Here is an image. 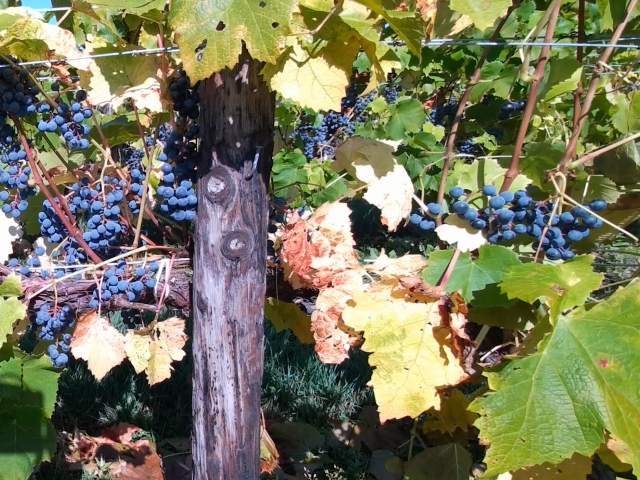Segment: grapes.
Here are the masks:
<instances>
[{
	"instance_id": "01657485",
	"label": "grapes",
	"mask_w": 640,
	"mask_h": 480,
	"mask_svg": "<svg viewBox=\"0 0 640 480\" xmlns=\"http://www.w3.org/2000/svg\"><path fill=\"white\" fill-rule=\"evenodd\" d=\"M103 182L116 186V191L108 192L106 195V209L101 198H92L98 196L101 191L102 182L96 183V190L90 191L88 187L91 180L88 177H82L78 182H74L71 189L76 193L72 198V202L68 204L70 212L76 219L77 209L89 210L90 219L86 222L91 232H84L82 240L92 248L93 252L99 256L102 261L112 259L115 256L128 252L126 247H120V241L117 234H121L125 229V224L120 222L118 214L121 213V207L118 202L123 201V183L128 180H120L119 177H103Z\"/></svg>"
},
{
	"instance_id": "b958b902",
	"label": "grapes",
	"mask_w": 640,
	"mask_h": 480,
	"mask_svg": "<svg viewBox=\"0 0 640 480\" xmlns=\"http://www.w3.org/2000/svg\"><path fill=\"white\" fill-rule=\"evenodd\" d=\"M163 152L159 155L161 162L174 160L177 165L163 163L161 171L163 180L157 188V195L166 198L161 203V212L168 214L176 222L192 221L195 218L193 208L197 203L196 189L193 184L198 182V172L193 169L198 163V151L196 144L189 142L187 145L183 135L178 131H172L169 138L163 140Z\"/></svg>"
},
{
	"instance_id": "0513c4c2",
	"label": "grapes",
	"mask_w": 640,
	"mask_h": 480,
	"mask_svg": "<svg viewBox=\"0 0 640 480\" xmlns=\"http://www.w3.org/2000/svg\"><path fill=\"white\" fill-rule=\"evenodd\" d=\"M490 207L497 216L492 218V233L487 236L491 244L503 241L512 242L516 235H528L537 238L532 243V250L537 251L543 239V229L555 210V203L548 201L544 205L535 204V199L527 190L514 193L503 191L499 196L489 199Z\"/></svg>"
},
{
	"instance_id": "84f90ec7",
	"label": "grapes",
	"mask_w": 640,
	"mask_h": 480,
	"mask_svg": "<svg viewBox=\"0 0 640 480\" xmlns=\"http://www.w3.org/2000/svg\"><path fill=\"white\" fill-rule=\"evenodd\" d=\"M588 210L574 205L572 211L564 210L560 215H554L551 227L542 242L540 252H545V258L551 262L560 259L563 262L572 260L576 253L571 251V245L566 241H582L591 235V229H599L603 221L589 211H605L608 203L604 199H592L588 204H583Z\"/></svg>"
},
{
	"instance_id": "f8a65327",
	"label": "grapes",
	"mask_w": 640,
	"mask_h": 480,
	"mask_svg": "<svg viewBox=\"0 0 640 480\" xmlns=\"http://www.w3.org/2000/svg\"><path fill=\"white\" fill-rule=\"evenodd\" d=\"M28 74L27 69H21L18 76L10 69H0V150L11 144L15 138V129L6 124L7 111L19 117H25L35 111L39 114L53 111L50 104L40 103V99L35 96L40 91L27 79Z\"/></svg>"
},
{
	"instance_id": "5460f4e3",
	"label": "grapes",
	"mask_w": 640,
	"mask_h": 480,
	"mask_svg": "<svg viewBox=\"0 0 640 480\" xmlns=\"http://www.w3.org/2000/svg\"><path fill=\"white\" fill-rule=\"evenodd\" d=\"M52 309L49 304H42L41 308L35 313L34 323L37 326H43L41 332L38 334V339L44 342H51L57 339V331L64 334L62 339L57 341V345L62 352L57 349L55 344L48 346L49 358L52 363L57 367H64L70 362V356L68 352L71 347L68 343L72 340V335L67 333L69 327L75 326V319L71 317L72 309L69 305L62 306L59 311L55 313L56 317H52L48 311Z\"/></svg>"
},
{
	"instance_id": "83cd7487",
	"label": "grapes",
	"mask_w": 640,
	"mask_h": 480,
	"mask_svg": "<svg viewBox=\"0 0 640 480\" xmlns=\"http://www.w3.org/2000/svg\"><path fill=\"white\" fill-rule=\"evenodd\" d=\"M127 266V261L121 258L116 261V269L107 268L104 271V277L107 279L104 280L101 285V289L103 290L102 299L104 301H108L119 294L127 295L128 300L139 301L141 299V291L145 285L149 289H153L158 283L156 277L147 278L144 283L140 280H135L132 283L125 280L119 281L116 276L123 275Z\"/></svg>"
},
{
	"instance_id": "e5b3c951",
	"label": "grapes",
	"mask_w": 640,
	"mask_h": 480,
	"mask_svg": "<svg viewBox=\"0 0 640 480\" xmlns=\"http://www.w3.org/2000/svg\"><path fill=\"white\" fill-rule=\"evenodd\" d=\"M55 102L59 104L56 108L58 115H53L52 119L47 123L46 119H41L37 126L39 131H47L48 133H55L59 128V131L63 134V139L67 140V147L71 150L87 151L90 147V142L86 138H80L79 135L86 136L91 133V127L89 125H81L77 133L69 127L68 119L64 114L69 111V106L63 102L62 97L55 99Z\"/></svg>"
},
{
	"instance_id": "2adb6a1f",
	"label": "grapes",
	"mask_w": 640,
	"mask_h": 480,
	"mask_svg": "<svg viewBox=\"0 0 640 480\" xmlns=\"http://www.w3.org/2000/svg\"><path fill=\"white\" fill-rule=\"evenodd\" d=\"M181 77L170 82L169 91L172 93V110L178 112L180 118L189 117L196 119L199 116L198 103L200 102L199 88L201 82L197 81L194 87H190L187 72L182 67L178 68Z\"/></svg>"
},
{
	"instance_id": "ef6de9ee",
	"label": "grapes",
	"mask_w": 640,
	"mask_h": 480,
	"mask_svg": "<svg viewBox=\"0 0 640 480\" xmlns=\"http://www.w3.org/2000/svg\"><path fill=\"white\" fill-rule=\"evenodd\" d=\"M42 207L44 211L38 213V222L41 224L40 234L46 236L49 244L60 243L67 238L68 230L48 199L43 201Z\"/></svg>"
},
{
	"instance_id": "1ff8f66d",
	"label": "grapes",
	"mask_w": 640,
	"mask_h": 480,
	"mask_svg": "<svg viewBox=\"0 0 640 480\" xmlns=\"http://www.w3.org/2000/svg\"><path fill=\"white\" fill-rule=\"evenodd\" d=\"M453 211L457 214L460 220L469 221V225L472 229L486 230L488 228V217L491 213L489 207H485L482 210L470 209V204L465 200L456 201L452 205Z\"/></svg>"
},
{
	"instance_id": "54f908b8",
	"label": "grapes",
	"mask_w": 640,
	"mask_h": 480,
	"mask_svg": "<svg viewBox=\"0 0 640 480\" xmlns=\"http://www.w3.org/2000/svg\"><path fill=\"white\" fill-rule=\"evenodd\" d=\"M18 173L19 169L16 165L10 166L8 168V173H5L4 168L0 166V184L2 186L6 185L8 190H12L13 188L26 189L28 187V176L31 174L30 167L25 166L22 169V174L18 177H12Z\"/></svg>"
},
{
	"instance_id": "91a60905",
	"label": "grapes",
	"mask_w": 640,
	"mask_h": 480,
	"mask_svg": "<svg viewBox=\"0 0 640 480\" xmlns=\"http://www.w3.org/2000/svg\"><path fill=\"white\" fill-rule=\"evenodd\" d=\"M36 194L37 188L35 186L29 187L27 190H21L16 195V199L19 201L17 204L14 200H11L9 205L2 204L0 209L4 214L9 213L13 218H19L21 216V212H25L30 207V203L26 199L29 196H35Z\"/></svg>"
},
{
	"instance_id": "dcf779d0",
	"label": "grapes",
	"mask_w": 640,
	"mask_h": 480,
	"mask_svg": "<svg viewBox=\"0 0 640 480\" xmlns=\"http://www.w3.org/2000/svg\"><path fill=\"white\" fill-rule=\"evenodd\" d=\"M88 97L87 92L84 89H78L75 93V101L70 106L72 114V122L74 124L82 123L84 120H89L94 115V111L90 107L82 109V101Z\"/></svg>"
},
{
	"instance_id": "802abce8",
	"label": "grapes",
	"mask_w": 640,
	"mask_h": 480,
	"mask_svg": "<svg viewBox=\"0 0 640 480\" xmlns=\"http://www.w3.org/2000/svg\"><path fill=\"white\" fill-rule=\"evenodd\" d=\"M62 248L66 252L67 257L65 261L67 263L75 264L76 260L78 262H86L88 260V255L84 251H77L79 249V243L74 237H70L68 241L62 245Z\"/></svg>"
},
{
	"instance_id": "012428b0",
	"label": "grapes",
	"mask_w": 640,
	"mask_h": 480,
	"mask_svg": "<svg viewBox=\"0 0 640 480\" xmlns=\"http://www.w3.org/2000/svg\"><path fill=\"white\" fill-rule=\"evenodd\" d=\"M130 177L132 178V184L129 186V192L141 197L143 194V183L141 181L145 180V173L138 168H133L130 171Z\"/></svg>"
},
{
	"instance_id": "9fbda902",
	"label": "grapes",
	"mask_w": 640,
	"mask_h": 480,
	"mask_svg": "<svg viewBox=\"0 0 640 480\" xmlns=\"http://www.w3.org/2000/svg\"><path fill=\"white\" fill-rule=\"evenodd\" d=\"M527 102L525 100H518L516 103L505 102L497 113V117L500 120H507L509 118V112L514 113L517 111H523L526 108Z\"/></svg>"
},
{
	"instance_id": "34c12dc5",
	"label": "grapes",
	"mask_w": 640,
	"mask_h": 480,
	"mask_svg": "<svg viewBox=\"0 0 640 480\" xmlns=\"http://www.w3.org/2000/svg\"><path fill=\"white\" fill-rule=\"evenodd\" d=\"M409 222L412 225L417 226L419 229L423 230H435L437 227L435 226V219H424L420 212L412 213L408 217Z\"/></svg>"
},
{
	"instance_id": "4a4d1313",
	"label": "grapes",
	"mask_w": 640,
	"mask_h": 480,
	"mask_svg": "<svg viewBox=\"0 0 640 480\" xmlns=\"http://www.w3.org/2000/svg\"><path fill=\"white\" fill-rule=\"evenodd\" d=\"M24 159H25L24 151L21 150V147L18 144H15L13 147H11L8 150V154H3L0 157V162L2 164H8L10 161H18V160H24Z\"/></svg>"
},
{
	"instance_id": "23402543",
	"label": "grapes",
	"mask_w": 640,
	"mask_h": 480,
	"mask_svg": "<svg viewBox=\"0 0 640 480\" xmlns=\"http://www.w3.org/2000/svg\"><path fill=\"white\" fill-rule=\"evenodd\" d=\"M35 255L36 256H33L31 259H27L26 260V263H27L28 266H40L41 265V261L37 256H40V255L44 256L45 255V248L41 247V246L36 247L35 248ZM28 266H21L20 267L21 268L20 272L24 276L32 275L33 271H30Z\"/></svg>"
},
{
	"instance_id": "62ce99fe",
	"label": "grapes",
	"mask_w": 640,
	"mask_h": 480,
	"mask_svg": "<svg viewBox=\"0 0 640 480\" xmlns=\"http://www.w3.org/2000/svg\"><path fill=\"white\" fill-rule=\"evenodd\" d=\"M92 295L94 299L90 300L89 307L91 308V310H96L100 304V300L98 299L100 297L99 290L97 288H94L92 290Z\"/></svg>"
},
{
	"instance_id": "83beee25",
	"label": "grapes",
	"mask_w": 640,
	"mask_h": 480,
	"mask_svg": "<svg viewBox=\"0 0 640 480\" xmlns=\"http://www.w3.org/2000/svg\"><path fill=\"white\" fill-rule=\"evenodd\" d=\"M127 208L130 210V213L133 216H138L139 211H140V207L138 206V204L136 203L135 200L131 199L128 201L127 203Z\"/></svg>"
}]
</instances>
